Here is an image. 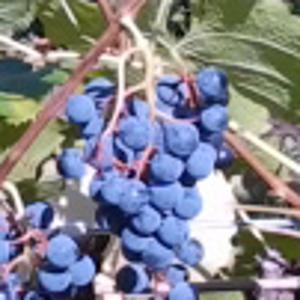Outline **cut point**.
<instances>
[{"instance_id": "2", "label": "cut point", "mask_w": 300, "mask_h": 300, "mask_svg": "<svg viewBox=\"0 0 300 300\" xmlns=\"http://www.w3.org/2000/svg\"><path fill=\"white\" fill-rule=\"evenodd\" d=\"M4 188H7L12 196V202L14 207L16 208L19 205H23L22 197L19 191V188L14 182H11L10 180H6V183L4 185H1Z\"/></svg>"}, {"instance_id": "1", "label": "cut point", "mask_w": 300, "mask_h": 300, "mask_svg": "<svg viewBox=\"0 0 300 300\" xmlns=\"http://www.w3.org/2000/svg\"><path fill=\"white\" fill-rule=\"evenodd\" d=\"M126 27L134 36L137 44L141 47L143 57H144V67H145V76H146V87H147V98L151 100L154 97V84H153V73H152V64H151V54L148 47V44L144 41L141 33L135 27V25L129 21L126 24Z\"/></svg>"}]
</instances>
